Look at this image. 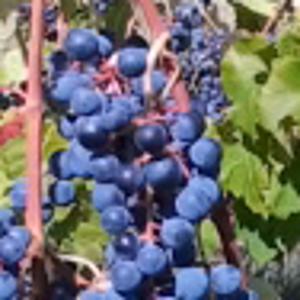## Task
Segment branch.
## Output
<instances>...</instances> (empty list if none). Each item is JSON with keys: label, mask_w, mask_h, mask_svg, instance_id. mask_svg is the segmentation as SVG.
Returning a JSON list of instances; mask_svg holds the SVG:
<instances>
[{"label": "branch", "mask_w": 300, "mask_h": 300, "mask_svg": "<svg viewBox=\"0 0 300 300\" xmlns=\"http://www.w3.org/2000/svg\"><path fill=\"white\" fill-rule=\"evenodd\" d=\"M231 213L232 208L229 202H216L211 212V221L224 257L230 264L237 265L241 261V255L235 246L237 234L233 228Z\"/></svg>", "instance_id": "branch-3"}, {"label": "branch", "mask_w": 300, "mask_h": 300, "mask_svg": "<svg viewBox=\"0 0 300 300\" xmlns=\"http://www.w3.org/2000/svg\"><path fill=\"white\" fill-rule=\"evenodd\" d=\"M142 11L151 31L150 37L160 43L166 93L177 107L186 108L191 103V97L174 53L169 27L165 21L160 20L154 0H143Z\"/></svg>", "instance_id": "branch-2"}, {"label": "branch", "mask_w": 300, "mask_h": 300, "mask_svg": "<svg viewBox=\"0 0 300 300\" xmlns=\"http://www.w3.org/2000/svg\"><path fill=\"white\" fill-rule=\"evenodd\" d=\"M30 76L28 80L27 105L30 108L28 155L31 176L28 181V207L24 213V225L32 236L33 245L29 260V282L33 300H47V271L45 250L47 237L38 220L41 212V186L44 181V157L41 143L44 135V103L41 100L43 80L42 37L45 25V3L31 0L28 7Z\"/></svg>", "instance_id": "branch-1"}]
</instances>
